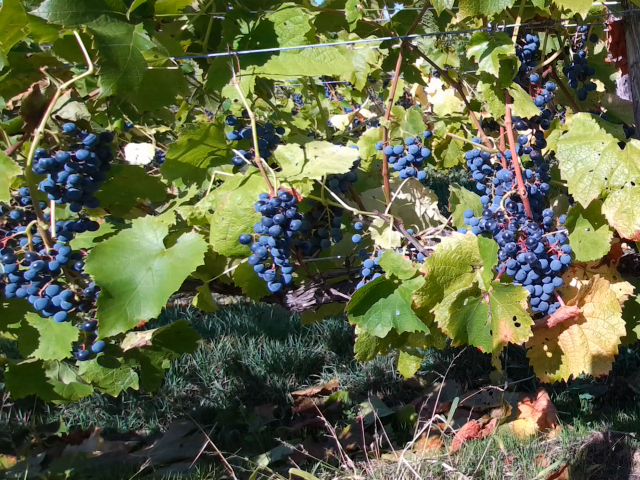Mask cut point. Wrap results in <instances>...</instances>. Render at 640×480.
<instances>
[{
    "mask_svg": "<svg viewBox=\"0 0 640 480\" xmlns=\"http://www.w3.org/2000/svg\"><path fill=\"white\" fill-rule=\"evenodd\" d=\"M44 132H47V134H49V135L53 136V139H55V141H56V143H57L58 145H62V142L60 141L59 136H58L56 133L51 132V131H50L49 129H47V128L44 130Z\"/></svg>",
    "mask_w": 640,
    "mask_h": 480,
    "instance_id": "2",
    "label": "cut point"
},
{
    "mask_svg": "<svg viewBox=\"0 0 640 480\" xmlns=\"http://www.w3.org/2000/svg\"><path fill=\"white\" fill-rule=\"evenodd\" d=\"M260 161L264 164V166L269 170L270 174L272 175L274 186H277L276 175H275V172L273 171V169L264 160V158L260 157Z\"/></svg>",
    "mask_w": 640,
    "mask_h": 480,
    "instance_id": "1",
    "label": "cut point"
},
{
    "mask_svg": "<svg viewBox=\"0 0 640 480\" xmlns=\"http://www.w3.org/2000/svg\"><path fill=\"white\" fill-rule=\"evenodd\" d=\"M33 224H36V221L29 222V224L26 226L25 234H27L28 237H31L30 229L32 228Z\"/></svg>",
    "mask_w": 640,
    "mask_h": 480,
    "instance_id": "3",
    "label": "cut point"
}]
</instances>
